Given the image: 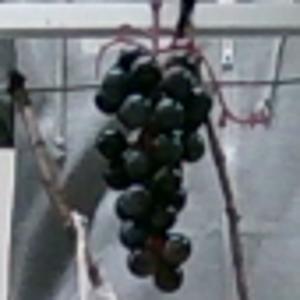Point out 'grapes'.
<instances>
[{
	"label": "grapes",
	"instance_id": "01657485",
	"mask_svg": "<svg viewBox=\"0 0 300 300\" xmlns=\"http://www.w3.org/2000/svg\"><path fill=\"white\" fill-rule=\"evenodd\" d=\"M93 98L96 111L117 116L128 133L112 125L98 129L94 148L104 157L99 172L110 189L120 221L117 241L131 251L127 269L137 279L152 277L156 291L173 294L185 282L181 266L192 255L188 236L168 232L187 202L182 164L202 160L206 144L198 130L215 105L202 86L191 55L172 53L162 66L146 46L121 47Z\"/></svg>",
	"mask_w": 300,
	"mask_h": 300
}]
</instances>
